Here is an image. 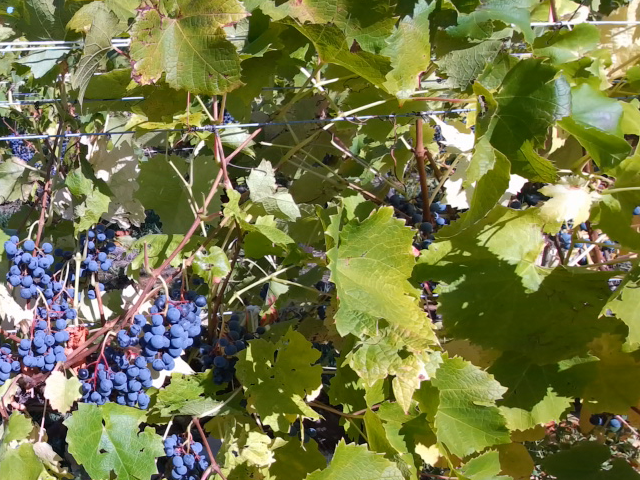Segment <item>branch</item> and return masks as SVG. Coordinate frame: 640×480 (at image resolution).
<instances>
[{
	"instance_id": "1",
	"label": "branch",
	"mask_w": 640,
	"mask_h": 480,
	"mask_svg": "<svg viewBox=\"0 0 640 480\" xmlns=\"http://www.w3.org/2000/svg\"><path fill=\"white\" fill-rule=\"evenodd\" d=\"M262 131H263L262 127H256L254 131L250 133L242 142H240L238 145H235L227 155L225 144H224V138L221 131L219 129H212V132L217 140L219 156L221 158V169H218L215 172V175L210 180L208 184V188L203 196V200L201 202V205L199 207V210L196 214V217L192 225L185 232L181 240V243L170 252L169 256L165 259L164 263L149 277L143 289L139 293L133 305L128 309V311L122 312L121 314L114 316L99 330H96L94 333L88 336L81 344L74 346L65 355V358L69 360L64 364V367L66 369L72 368L76 364L81 363L82 361L87 359L91 354L99 350L102 347V344L100 342L94 343L89 348L87 347L93 341L101 337L109 329L115 326V328L113 329V332L111 333V336L107 338V344L109 346H112L114 344V338H117L119 336L121 330L127 325V323L132 318L133 314L139 309L142 302H147L148 300H150L151 298L155 297L160 293V291L163 289V286L161 284L156 285L153 288V290H150V289L153 286L154 282L157 280V278L160 277L172 264L173 260L177 257V255H179L188 246V242L190 241L191 236L197 231L200 223L203 220L208 204L210 202V198L215 190V186L219 181V179L222 177V180L224 182H227L229 180L228 162H231L234 159L235 155L238 152H240L242 149H244L248 144H250Z\"/></svg>"
},
{
	"instance_id": "2",
	"label": "branch",
	"mask_w": 640,
	"mask_h": 480,
	"mask_svg": "<svg viewBox=\"0 0 640 480\" xmlns=\"http://www.w3.org/2000/svg\"><path fill=\"white\" fill-rule=\"evenodd\" d=\"M416 143H417V169L419 174L420 202L423 219L429 221L431 219V211L429 210L427 200L426 172L424 166V141H423V118H416Z\"/></svg>"
},
{
	"instance_id": "3",
	"label": "branch",
	"mask_w": 640,
	"mask_h": 480,
	"mask_svg": "<svg viewBox=\"0 0 640 480\" xmlns=\"http://www.w3.org/2000/svg\"><path fill=\"white\" fill-rule=\"evenodd\" d=\"M58 143H59V139H54L53 145H52V149H51V157H50L49 165L47 167V172H46L45 190H44V193H43L42 207H41L40 217H39V220H38V228H37V234H36V245H35V247L33 249V253H32L33 257H36L38 255V252H39V250L41 248L42 230H43V224H44L45 214H46V210H47L48 195H49V192H50L51 175H52V170H53L55 159H56V151H57Z\"/></svg>"
},
{
	"instance_id": "4",
	"label": "branch",
	"mask_w": 640,
	"mask_h": 480,
	"mask_svg": "<svg viewBox=\"0 0 640 480\" xmlns=\"http://www.w3.org/2000/svg\"><path fill=\"white\" fill-rule=\"evenodd\" d=\"M222 230H223V227L221 225H218L214 229L210 237L207 238L203 243H201L199 246L195 248V250L192 252L190 257L186 260L184 265H181L175 268L171 272V274L164 279V282L166 284H170L174 279H176L180 275V273L186 272L192 266V264L195 262L197 257L201 254V252L217 240Z\"/></svg>"
},
{
	"instance_id": "5",
	"label": "branch",
	"mask_w": 640,
	"mask_h": 480,
	"mask_svg": "<svg viewBox=\"0 0 640 480\" xmlns=\"http://www.w3.org/2000/svg\"><path fill=\"white\" fill-rule=\"evenodd\" d=\"M193 419H194V421H195V423L197 425V428H198L199 432L202 435L203 443H204V446L206 448V451H207V454L209 456L210 463H211L210 470H211L212 473H217L219 471V467L216 464L215 456H214V453H213L212 448L210 446V443L208 441L207 433H206L205 429L203 428V425L201 423V420H200L199 416L198 415H194Z\"/></svg>"
},
{
	"instance_id": "6",
	"label": "branch",
	"mask_w": 640,
	"mask_h": 480,
	"mask_svg": "<svg viewBox=\"0 0 640 480\" xmlns=\"http://www.w3.org/2000/svg\"><path fill=\"white\" fill-rule=\"evenodd\" d=\"M195 98L199 101L200 106L204 109V111L206 112V115L209 118V121L211 123H214L216 121V116L213 113L212 108L209 106V104L207 103L206 99L202 96V93L200 91H197L195 93Z\"/></svg>"
}]
</instances>
